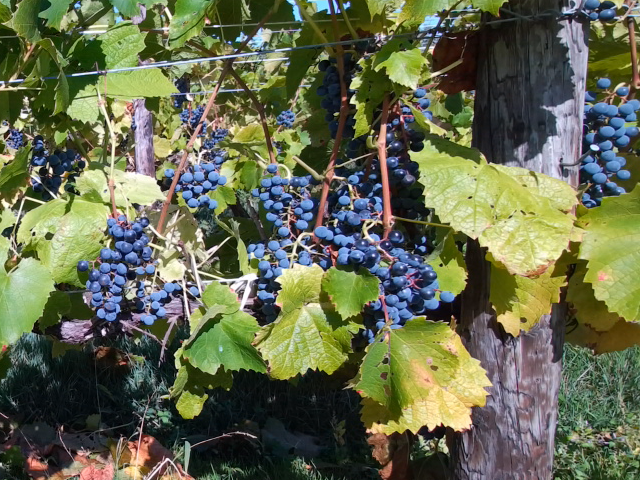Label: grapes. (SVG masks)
Masks as SVG:
<instances>
[{
	"label": "grapes",
	"instance_id": "01657485",
	"mask_svg": "<svg viewBox=\"0 0 640 480\" xmlns=\"http://www.w3.org/2000/svg\"><path fill=\"white\" fill-rule=\"evenodd\" d=\"M363 171H355L348 177L351 185L363 198L352 203L354 211L335 210L332 218L334 225L318 226L314 237L325 244L342 246L337 251V263L340 266H351L360 263L368 267L371 274L381 281L379 292L385 296L386 312L389 315V327L398 329L405 320L413 319L416 314L426 310H436L440 301L435 296L438 289L437 271L431 264H424L425 255L429 251V238L419 234L415 240L407 243V252L399 245L406 241V234L400 229H392L388 240L380 243V249L388 256L397 258L391 267L380 265L381 254L371 241L365 239L360 231H350V226H358L363 221L375 219L383 209L380 174L372 171L369 180Z\"/></svg>",
	"mask_w": 640,
	"mask_h": 480
},
{
	"label": "grapes",
	"instance_id": "b958b902",
	"mask_svg": "<svg viewBox=\"0 0 640 480\" xmlns=\"http://www.w3.org/2000/svg\"><path fill=\"white\" fill-rule=\"evenodd\" d=\"M106 224L109 228L108 234L115 237L112 248H102L98 257L101 260L111 259L112 262L101 261L99 270L92 269L89 279L86 281L85 289L91 291L90 305L99 308L96 316L113 322L117 319V314L122 310L120 303L123 301V287L128 281H134L139 275H153L156 272L154 265L137 267L134 271L129 270L126 263L135 266L151 259L153 248L146 246L149 238L143 231L149 224L148 217H141L138 222L131 221L130 229L123 228L113 218H108Z\"/></svg>",
	"mask_w": 640,
	"mask_h": 480
},
{
	"label": "grapes",
	"instance_id": "0513c4c2",
	"mask_svg": "<svg viewBox=\"0 0 640 480\" xmlns=\"http://www.w3.org/2000/svg\"><path fill=\"white\" fill-rule=\"evenodd\" d=\"M639 111L640 101L637 99H630L620 107L608 103L584 106L582 121L585 124H590L595 119L604 122L608 118V126H601L597 133H588L585 136L588 144L596 145L601 149L600 161L605 164V167L594 155H585L581 159L580 170L592 176L594 183L590 191L581 195V204L584 207H598L601 204L599 192L603 189L610 192L612 196L627 193L625 187H619L616 183L607 181V178H612L614 173L619 181H628L632 177L629 169H622L627 164V159L624 156H617L612 149L614 144L617 147H626L631 142V138L639 135V129L636 126H624L626 121L634 122Z\"/></svg>",
	"mask_w": 640,
	"mask_h": 480
},
{
	"label": "grapes",
	"instance_id": "84f90ec7",
	"mask_svg": "<svg viewBox=\"0 0 640 480\" xmlns=\"http://www.w3.org/2000/svg\"><path fill=\"white\" fill-rule=\"evenodd\" d=\"M224 162L225 158L223 156L216 155L214 162L202 161L200 164H195L193 167L195 173H184L178 180L174 191L179 193L182 190V198L186 200V204L190 208H197L205 204L209 210L217 209L218 202L215 199H210L206 195H200L196 198L194 193L202 194L209 191H217L218 186L227 184V176L219 175L216 171Z\"/></svg>",
	"mask_w": 640,
	"mask_h": 480
},
{
	"label": "grapes",
	"instance_id": "f8a65327",
	"mask_svg": "<svg viewBox=\"0 0 640 480\" xmlns=\"http://www.w3.org/2000/svg\"><path fill=\"white\" fill-rule=\"evenodd\" d=\"M293 244L292 239L282 240H270L267 243V249L274 253V258L279 261V266L276 267L269 260H261L257 263V267L261 269V279H257L255 284L260 290L258 292V299L260 301L272 303L276 299V293L281 285L275 282L276 279L282 274L283 270H287L290 267V260L286 258L287 251L283 248L285 246H291Z\"/></svg>",
	"mask_w": 640,
	"mask_h": 480
},
{
	"label": "grapes",
	"instance_id": "5460f4e3",
	"mask_svg": "<svg viewBox=\"0 0 640 480\" xmlns=\"http://www.w3.org/2000/svg\"><path fill=\"white\" fill-rule=\"evenodd\" d=\"M34 150L42 151L43 150V136L37 135L34 138ZM48 155V151L44 150L37 155H34L31 159L32 166H44L47 162H49L50 166L53 168V178L41 177L40 181L47 186V190L43 191V187L36 179H32L31 183L33 184L32 190L35 193L42 192V199L44 201H48L51 199L50 191L53 194H57L59 192V187L61 186V177L64 171H71V163L74 161V151L72 149H67L66 153H60L58 155H51L50 157H44Z\"/></svg>",
	"mask_w": 640,
	"mask_h": 480
},
{
	"label": "grapes",
	"instance_id": "83cd7487",
	"mask_svg": "<svg viewBox=\"0 0 640 480\" xmlns=\"http://www.w3.org/2000/svg\"><path fill=\"white\" fill-rule=\"evenodd\" d=\"M312 181V175H306L305 177L291 176L289 180L275 175L272 179L263 178L261 180V186L263 188H269L270 192L266 191L265 193H261L259 189H252L251 195L258 197V199L263 202V209L265 211L274 210L283 213L284 207L293 200L291 193H284V186L289 184L292 188H304Z\"/></svg>",
	"mask_w": 640,
	"mask_h": 480
},
{
	"label": "grapes",
	"instance_id": "e5b3c951",
	"mask_svg": "<svg viewBox=\"0 0 640 480\" xmlns=\"http://www.w3.org/2000/svg\"><path fill=\"white\" fill-rule=\"evenodd\" d=\"M337 59L333 56H329L328 60H322L318 65L317 69L320 72H326L327 74L323 77V86L317 89V94L319 96H324L327 94V99H323L320 102V106L323 109L328 110V114L325 116V119L328 122H331L329 125V129L334 131L336 127L339 125V121L335 119V114L341 110V93L340 86L338 85L339 81V73L338 69L335 66H331V63H336Z\"/></svg>",
	"mask_w": 640,
	"mask_h": 480
},
{
	"label": "grapes",
	"instance_id": "2adb6a1f",
	"mask_svg": "<svg viewBox=\"0 0 640 480\" xmlns=\"http://www.w3.org/2000/svg\"><path fill=\"white\" fill-rule=\"evenodd\" d=\"M145 288V283L143 281H139L137 283V291L136 296L139 300L136 304V309L138 311H143L151 301L150 308L155 312L144 314L141 316V323H144L147 326H152L157 320L158 317H164L166 315V310L164 309V301L169 293H173L174 291H181L182 287L177 282H167L164 285V289H160L158 292H153L151 294H146L143 290Z\"/></svg>",
	"mask_w": 640,
	"mask_h": 480
},
{
	"label": "grapes",
	"instance_id": "ef6de9ee",
	"mask_svg": "<svg viewBox=\"0 0 640 480\" xmlns=\"http://www.w3.org/2000/svg\"><path fill=\"white\" fill-rule=\"evenodd\" d=\"M398 157H387V167L390 173L397 179L401 186H412L419 178V164L416 161L407 162L403 167L399 166Z\"/></svg>",
	"mask_w": 640,
	"mask_h": 480
},
{
	"label": "grapes",
	"instance_id": "1ff8f66d",
	"mask_svg": "<svg viewBox=\"0 0 640 480\" xmlns=\"http://www.w3.org/2000/svg\"><path fill=\"white\" fill-rule=\"evenodd\" d=\"M300 194L304 199L299 203V206H295L293 209L294 215H299V218L294 222V228L297 230H307L310 228V223L315 218V212L319 205V199L315 196H310L305 189L300 190Z\"/></svg>",
	"mask_w": 640,
	"mask_h": 480
},
{
	"label": "grapes",
	"instance_id": "54f908b8",
	"mask_svg": "<svg viewBox=\"0 0 640 480\" xmlns=\"http://www.w3.org/2000/svg\"><path fill=\"white\" fill-rule=\"evenodd\" d=\"M583 7L586 10H597L590 12L588 19L590 21L609 22L616 16L615 3L613 1L585 0Z\"/></svg>",
	"mask_w": 640,
	"mask_h": 480
},
{
	"label": "grapes",
	"instance_id": "91a60905",
	"mask_svg": "<svg viewBox=\"0 0 640 480\" xmlns=\"http://www.w3.org/2000/svg\"><path fill=\"white\" fill-rule=\"evenodd\" d=\"M403 128L406 133H411L409 135V141L412 142L410 144V149L412 152H420L424 149V139L426 138V134L424 132H417L414 128H409L408 123H414V116H405L403 119Z\"/></svg>",
	"mask_w": 640,
	"mask_h": 480
},
{
	"label": "grapes",
	"instance_id": "dcf779d0",
	"mask_svg": "<svg viewBox=\"0 0 640 480\" xmlns=\"http://www.w3.org/2000/svg\"><path fill=\"white\" fill-rule=\"evenodd\" d=\"M394 128H395L396 131H400L401 130L400 118L399 117H395L391 121V123L387 124L386 142L388 144H390L388 146V151L391 154H396V153L400 152L403 149V141L402 140H395V134L392 133Z\"/></svg>",
	"mask_w": 640,
	"mask_h": 480
},
{
	"label": "grapes",
	"instance_id": "802abce8",
	"mask_svg": "<svg viewBox=\"0 0 640 480\" xmlns=\"http://www.w3.org/2000/svg\"><path fill=\"white\" fill-rule=\"evenodd\" d=\"M427 95V90L425 88H417L413 91V97L417 100V106L420 109H424L421 111V114L425 116L429 121L434 120V115L429 109L431 108V100L429 98H423Z\"/></svg>",
	"mask_w": 640,
	"mask_h": 480
},
{
	"label": "grapes",
	"instance_id": "012428b0",
	"mask_svg": "<svg viewBox=\"0 0 640 480\" xmlns=\"http://www.w3.org/2000/svg\"><path fill=\"white\" fill-rule=\"evenodd\" d=\"M344 69H345V86L350 87L354 81L355 70L362 71L363 67L353 62V56L350 53H346L343 56Z\"/></svg>",
	"mask_w": 640,
	"mask_h": 480
},
{
	"label": "grapes",
	"instance_id": "9fbda902",
	"mask_svg": "<svg viewBox=\"0 0 640 480\" xmlns=\"http://www.w3.org/2000/svg\"><path fill=\"white\" fill-rule=\"evenodd\" d=\"M265 220L268 222H273V225L278 228V235L280 237H289L290 230L287 226H284V220L280 214L274 212H267L265 214Z\"/></svg>",
	"mask_w": 640,
	"mask_h": 480
},
{
	"label": "grapes",
	"instance_id": "34c12dc5",
	"mask_svg": "<svg viewBox=\"0 0 640 480\" xmlns=\"http://www.w3.org/2000/svg\"><path fill=\"white\" fill-rule=\"evenodd\" d=\"M317 254L318 250L316 248H311L310 252L307 251H299L297 253V261H292V263H299L300 265L304 266V267H312L313 266V260H312V254Z\"/></svg>",
	"mask_w": 640,
	"mask_h": 480
},
{
	"label": "grapes",
	"instance_id": "4a4d1313",
	"mask_svg": "<svg viewBox=\"0 0 640 480\" xmlns=\"http://www.w3.org/2000/svg\"><path fill=\"white\" fill-rule=\"evenodd\" d=\"M322 254L325 256L323 259H320L318 261V265L320 267H322L323 269H328L331 265H332V261L327 258L331 255L330 252V247L328 245H325L322 249Z\"/></svg>",
	"mask_w": 640,
	"mask_h": 480
}]
</instances>
